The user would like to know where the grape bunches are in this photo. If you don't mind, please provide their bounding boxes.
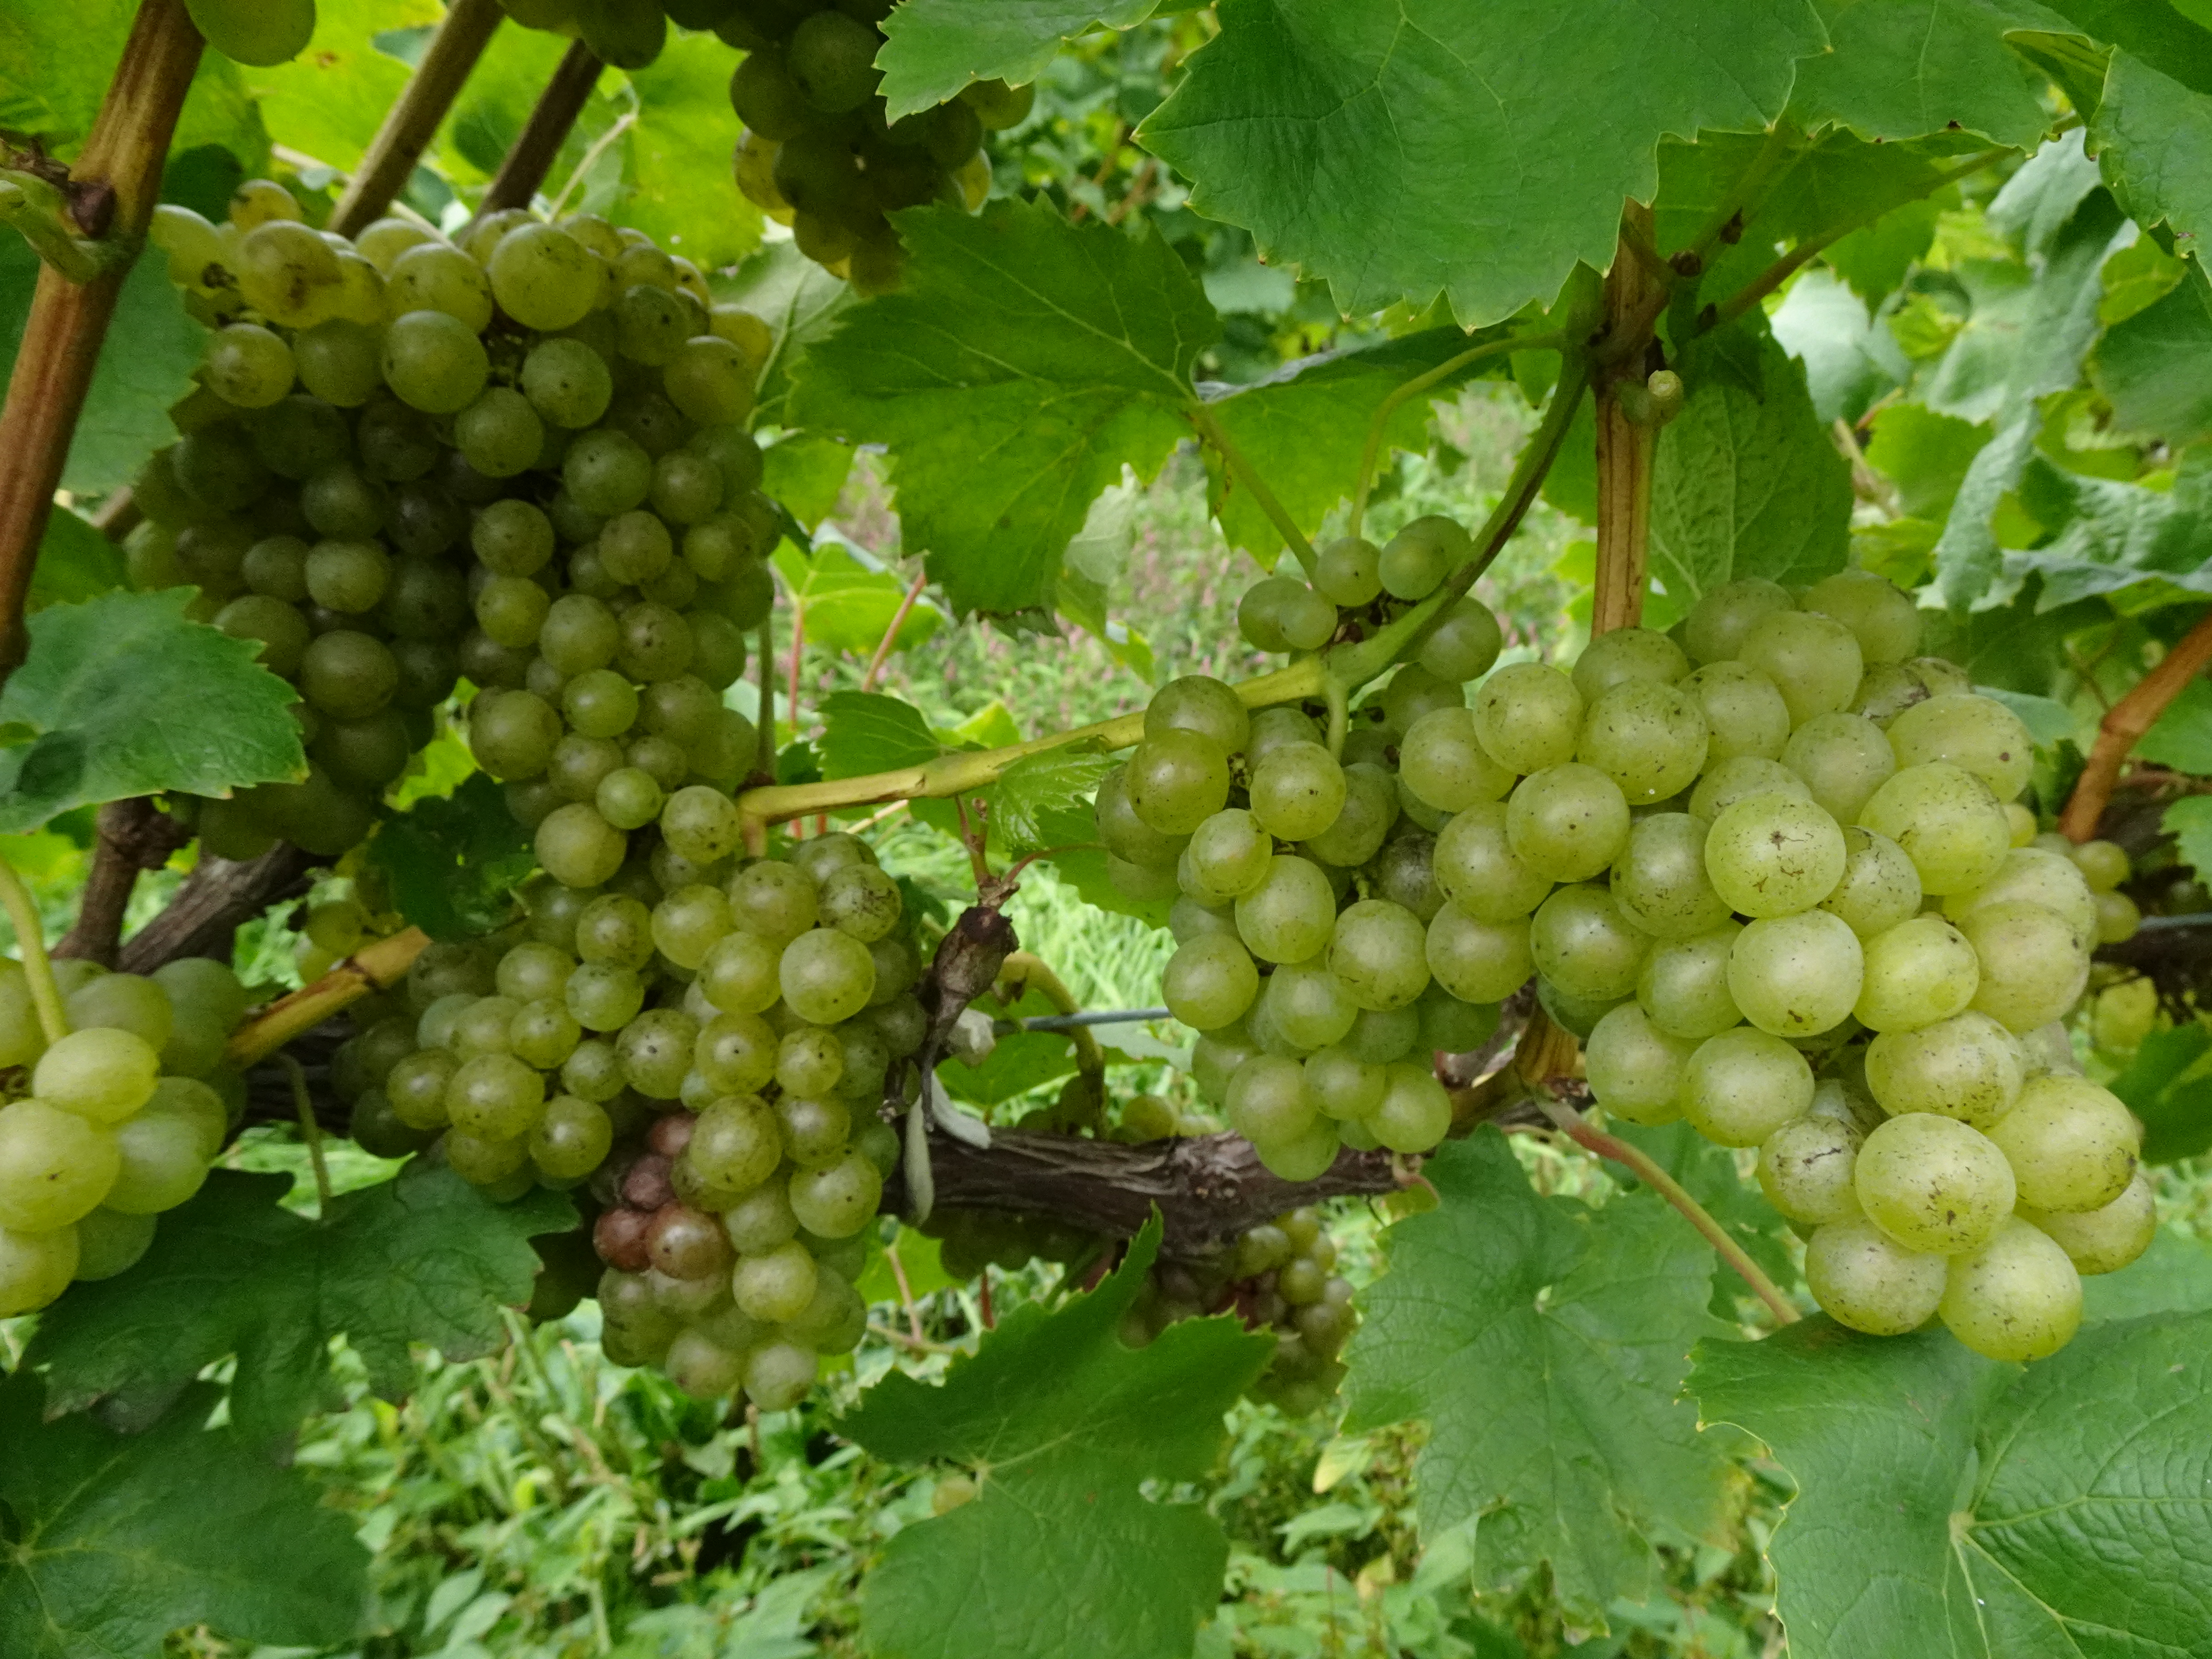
[1115,1258,1236,1348]
[1015,1076,1222,1147]
[1238,516,1500,706]
[666,0,1034,297]
[1103,664,1513,1183]
[1399,568,2159,1368]
[1233,1204,1354,1418]
[0,957,249,1321]
[121,182,470,865]
[592,832,930,1411]
[182,0,317,67]
[385,207,784,882]
[920,1213,1087,1281]
[495,0,667,70]
[329,865,664,1203]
